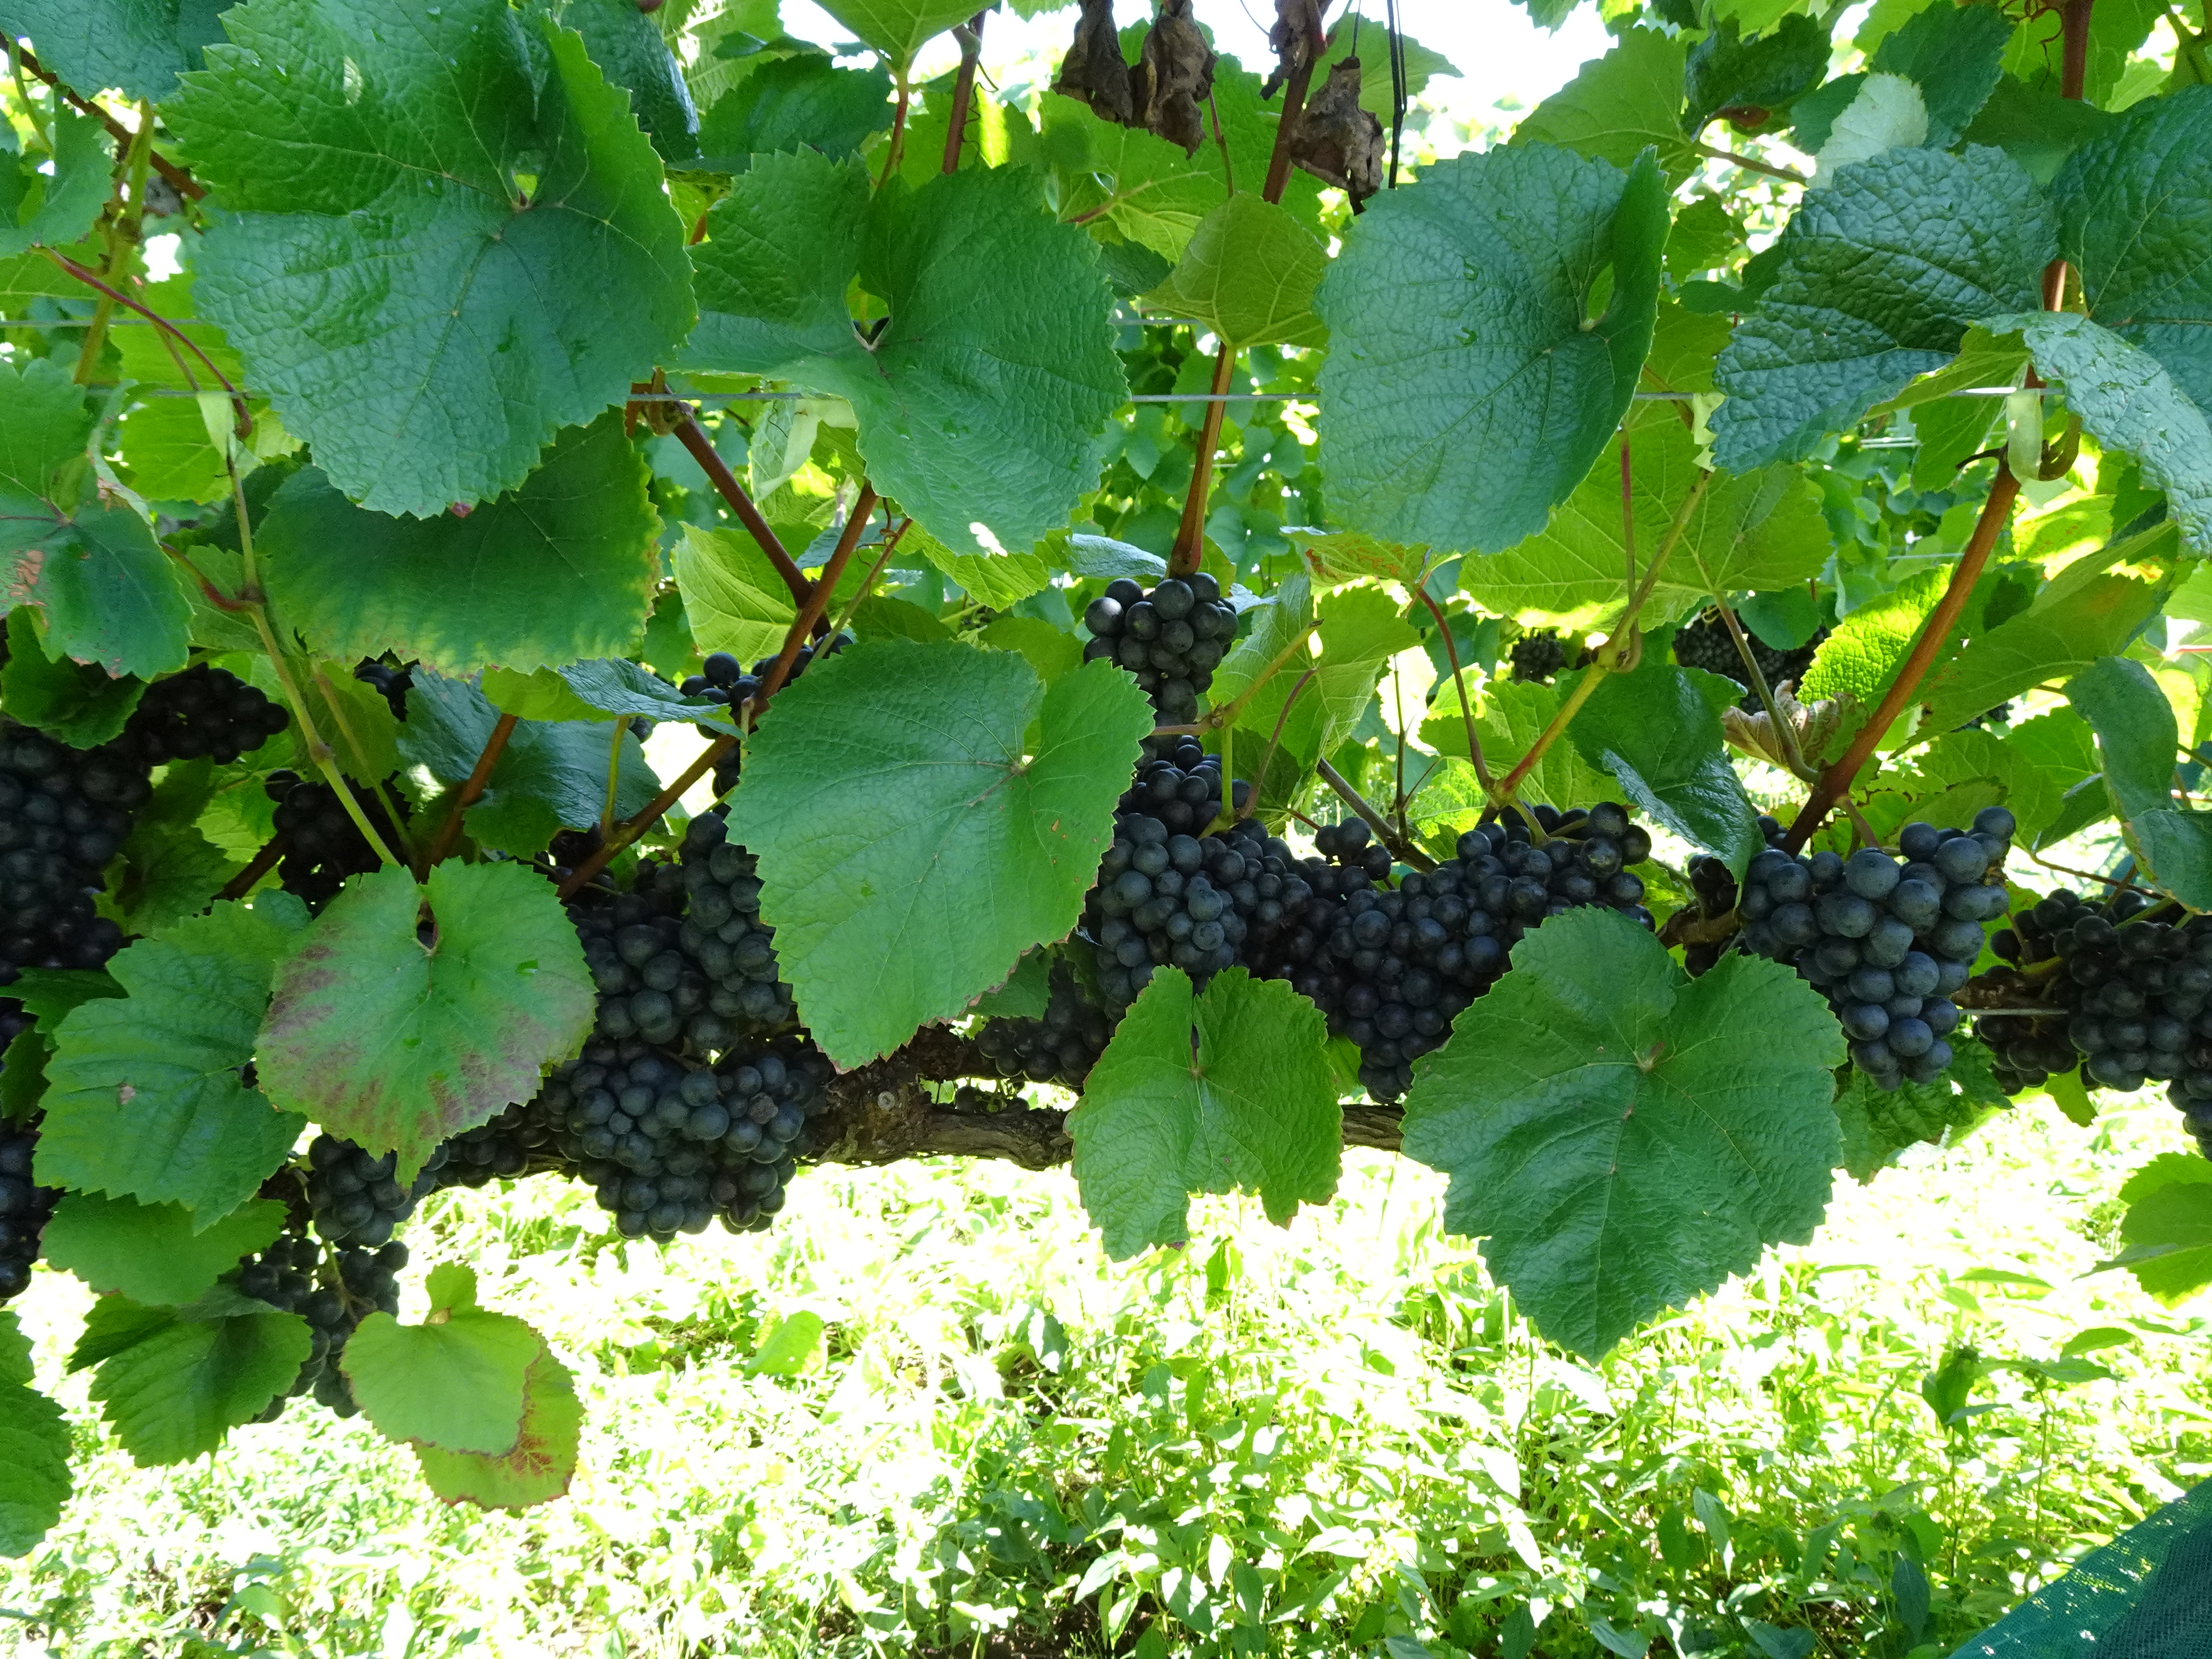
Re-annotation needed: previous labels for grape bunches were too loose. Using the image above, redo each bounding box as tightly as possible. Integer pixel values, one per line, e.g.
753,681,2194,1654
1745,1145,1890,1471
312,1241,409,1418
1735,808,2016,1090
218,1237,344,1424
1081,572,1240,767
265,771,414,920
1965,889,2089,1095
679,811,797,1025
1330,865,1537,1104
1110,735,1248,839
1199,816,1336,983
125,662,289,767
435,1090,552,1189
307,1133,449,1251
978,976,1117,1090
1682,815,1791,979
0,721,153,985
679,631,853,799
353,664,414,722
2054,891,2212,1091
700,1035,832,1234
2166,990,2212,1165
544,1035,730,1243
1437,801,1656,945
552,859,734,1050
1078,811,1247,1038
0,1009,67,1307
1303,816,1392,883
